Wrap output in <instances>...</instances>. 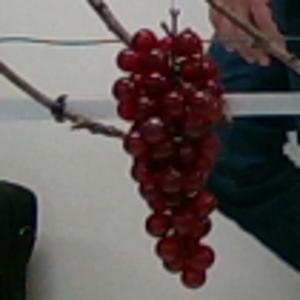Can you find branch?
<instances>
[{
    "instance_id": "170604dd",
    "label": "branch",
    "mask_w": 300,
    "mask_h": 300,
    "mask_svg": "<svg viewBox=\"0 0 300 300\" xmlns=\"http://www.w3.org/2000/svg\"><path fill=\"white\" fill-rule=\"evenodd\" d=\"M85 3L91 7L102 24L107 27L108 31L119 38V41H123L125 47L128 49L133 35L124 29V26L115 17L105 0H85Z\"/></svg>"
},
{
    "instance_id": "325d2c04",
    "label": "branch",
    "mask_w": 300,
    "mask_h": 300,
    "mask_svg": "<svg viewBox=\"0 0 300 300\" xmlns=\"http://www.w3.org/2000/svg\"><path fill=\"white\" fill-rule=\"evenodd\" d=\"M207 5L211 6L214 10L222 14L227 20L234 24L245 36H250L252 40V48L262 47L271 53L278 60L283 61L293 71L300 75V59L293 58L286 53H283L280 49L274 47L272 44L264 38L261 33L257 32L251 26H249L237 13L232 10H228L222 4H219L215 0L204 1Z\"/></svg>"
},
{
    "instance_id": "30e6481e",
    "label": "branch",
    "mask_w": 300,
    "mask_h": 300,
    "mask_svg": "<svg viewBox=\"0 0 300 300\" xmlns=\"http://www.w3.org/2000/svg\"><path fill=\"white\" fill-rule=\"evenodd\" d=\"M0 75L8 80L14 88L20 89L26 96L33 99L44 111L54 119V123H71L69 131L77 132L86 130L90 135H99L105 138H118L119 141L125 134V130L114 125H106L76 113L68 108L66 100L68 93H62L55 100L41 93L33 85L22 78L17 71L9 64L0 59Z\"/></svg>"
}]
</instances>
